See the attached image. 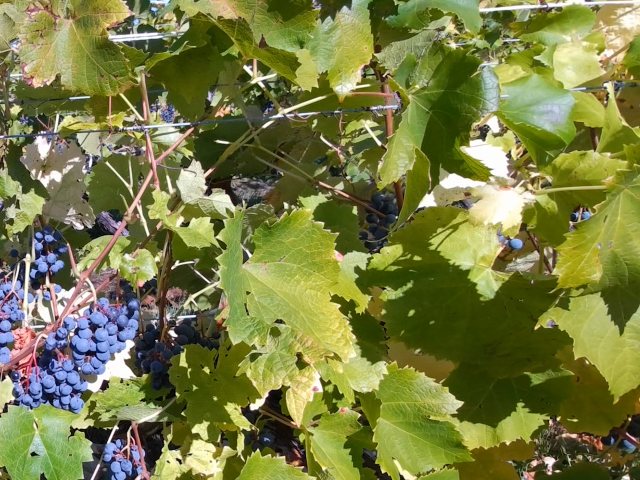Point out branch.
<instances>
[{
	"label": "branch",
	"instance_id": "1",
	"mask_svg": "<svg viewBox=\"0 0 640 480\" xmlns=\"http://www.w3.org/2000/svg\"><path fill=\"white\" fill-rule=\"evenodd\" d=\"M153 173H154L153 169H149L148 170V173H147V175L145 177V180L143 181L142 186L140 187V189L137 192L136 196L133 198V201L131 202L129 208L126 210V213L123 216V220H122L121 224L119 225L118 229L115 231V234L112 236V238L110 239V241L106 245V247L102 250L101 255L99 256V258L93 263V265H90L88 270H87V272L83 274V276L79 280L77 286L73 290V293L71 294V297L69 298V300H67L65 302V304H64V306L62 308V311H61L59 317L54 322V324L49 323L46 326V329L43 330L44 334H49V333H52L53 331H55L59 327V325L61 324V322L63 321L65 316H70V315L74 314L75 312L79 311L86 303H88V302H90L92 300L93 295L92 294H88L87 297L84 298L82 301H80L75 307H72L71 309L68 310L69 306L75 301L79 291L82 289V287H83L84 283L86 282L87 278L90 277L92 275V273L98 268V266L104 261L107 253L113 247V245L115 244L116 240L120 236L121 232L123 231L124 227L126 226V224L128 222V219H129L132 211L136 207L138 201L141 199L142 194L145 192Z\"/></svg>",
	"mask_w": 640,
	"mask_h": 480
},
{
	"label": "branch",
	"instance_id": "3",
	"mask_svg": "<svg viewBox=\"0 0 640 480\" xmlns=\"http://www.w3.org/2000/svg\"><path fill=\"white\" fill-rule=\"evenodd\" d=\"M274 122H275V119H269L267 122H265L264 124L260 125L253 132H251L250 134L246 135L241 142H238L231 150H229L227 153H225L223 156H221L219 159H217L209 168H207L206 171L203 174V178L207 179L209 174L212 173L216 169L217 166H219L223 161H225L231 155L236 153L237 150H239L241 147L245 146L250 139L255 137L257 134H259L264 129L268 128Z\"/></svg>",
	"mask_w": 640,
	"mask_h": 480
},
{
	"label": "branch",
	"instance_id": "11",
	"mask_svg": "<svg viewBox=\"0 0 640 480\" xmlns=\"http://www.w3.org/2000/svg\"><path fill=\"white\" fill-rule=\"evenodd\" d=\"M276 76H277L276 72H272L270 74L262 75V76H260L258 78H255L254 80L249 81L246 85H244L242 87H239L238 91L239 92H244V91L248 90L249 88H251L253 85H256L257 83H260V82L265 81L267 79L275 78Z\"/></svg>",
	"mask_w": 640,
	"mask_h": 480
},
{
	"label": "branch",
	"instance_id": "14",
	"mask_svg": "<svg viewBox=\"0 0 640 480\" xmlns=\"http://www.w3.org/2000/svg\"><path fill=\"white\" fill-rule=\"evenodd\" d=\"M116 274H117V271H116V270H113L109 275H107V276H106V278H105L104 280H102V281L98 284L97 288L95 289V292H96V293H100V292H101V290H102V288H103L107 283H109V282L113 279V277H114Z\"/></svg>",
	"mask_w": 640,
	"mask_h": 480
},
{
	"label": "branch",
	"instance_id": "13",
	"mask_svg": "<svg viewBox=\"0 0 640 480\" xmlns=\"http://www.w3.org/2000/svg\"><path fill=\"white\" fill-rule=\"evenodd\" d=\"M394 188L396 190L395 196L397 197V206L399 209H402L404 207V196L401 183L396 182Z\"/></svg>",
	"mask_w": 640,
	"mask_h": 480
},
{
	"label": "branch",
	"instance_id": "12",
	"mask_svg": "<svg viewBox=\"0 0 640 480\" xmlns=\"http://www.w3.org/2000/svg\"><path fill=\"white\" fill-rule=\"evenodd\" d=\"M230 100H231L230 96L224 97L219 102L211 106L210 109H207L206 113L203 116H201L200 119H208L215 110L222 107L225 103L229 102Z\"/></svg>",
	"mask_w": 640,
	"mask_h": 480
},
{
	"label": "branch",
	"instance_id": "5",
	"mask_svg": "<svg viewBox=\"0 0 640 480\" xmlns=\"http://www.w3.org/2000/svg\"><path fill=\"white\" fill-rule=\"evenodd\" d=\"M380 86V91L383 92L385 97V104H392V100L390 99V85L388 84V80H379L375 82L363 83V84H355V89H365L371 87Z\"/></svg>",
	"mask_w": 640,
	"mask_h": 480
},
{
	"label": "branch",
	"instance_id": "9",
	"mask_svg": "<svg viewBox=\"0 0 640 480\" xmlns=\"http://www.w3.org/2000/svg\"><path fill=\"white\" fill-rule=\"evenodd\" d=\"M33 348V344L29 343L26 345V347L18 352L14 357L13 360L8 363L6 366L3 367L4 371H8L9 369H11L12 367H14L17 363H19L22 359H24L25 357H27L30 353L31 350Z\"/></svg>",
	"mask_w": 640,
	"mask_h": 480
},
{
	"label": "branch",
	"instance_id": "2",
	"mask_svg": "<svg viewBox=\"0 0 640 480\" xmlns=\"http://www.w3.org/2000/svg\"><path fill=\"white\" fill-rule=\"evenodd\" d=\"M33 238V225H28V236L26 242V269H25V280H24V299L22 305V311L24 314L22 320V326L26 327L27 322L29 320V312H28V301H29V282H30V271H31V245Z\"/></svg>",
	"mask_w": 640,
	"mask_h": 480
},
{
	"label": "branch",
	"instance_id": "7",
	"mask_svg": "<svg viewBox=\"0 0 640 480\" xmlns=\"http://www.w3.org/2000/svg\"><path fill=\"white\" fill-rule=\"evenodd\" d=\"M131 426H132V429L134 431L136 443L138 445L140 468H141V471H142L143 474H147L148 470H147L146 465H145L144 447H143V443L141 441L139 428H138L135 420L131 421Z\"/></svg>",
	"mask_w": 640,
	"mask_h": 480
},
{
	"label": "branch",
	"instance_id": "6",
	"mask_svg": "<svg viewBox=\"0 0 640 480\" xmlns=\"http://www.w3.org/2000/svg\"><path fill=\"white\" fill-rule=\"evenodd\" d=\"M336 94H337L336 90L328 91V92H326L324 94H321V95H318V96H315V97H312V98H308L305 101L297 103L296 105H293L291 107L282 108L281 112H293L295 110H298L299 108H303V107L307 106L308 104H311V103H314V102H317V101H321L323 99H326L328 97L334 96Z\"/></svg>",
	"mask_w": 640,
	"mask_h": 480
},
{
	"label": "branch",
	"instance_id": "4",
	"mask_svg": "<svg viewBox=\"0 0 640 480\" xmlns=\"http://www.w3.org/2000/svg\"><path fill=\"white\" fill-rule=\"evenodd\" d=\"M172 259H173V253L169 252L167 257L165 273H164L163 288L160 294V302H159V328L160 329L164 328V304H165V297L168 291V283H169L170 270L172 266Z\"/></svg>",
	"mask_w": 640,
	"mask_h": 480
},
{
	"label": "branch",
	"instance_id": "8",
	"mask_svg": "<svg viewBox=\"0 0 640 480\" xmlns=\"http://www.w3.org/2000/svg\"><path fill=\"white\" fill-rule=\"evenodd\" d=\"M195 131L194 127H190L181 137H179L173 144L168 146L163 153L156 160V164L160 165L163 160L167 157V155L174 150L177 146H179L184 140H186L193 132Z\"/></svg>",
	"mask_w": 640,
	"mask_h": 480
},
{
	"label": "branch",
	"instance_id": "10",
	"mask_svg": "<svg viewBox=\"0 0 640 480\" xmlns=\"http://www.w3.org/2000/svg\"><path fill=\"white\" fill-rule=\"evenodd\" d=\"M163 226L162 222H158L153 229L151 230V232H149L145 238L141 241V243L132 251L131 256L132 257H136L137 254L139 253V251H141L145 245L148 243V241L158 232V230Z\"/></svg>",
	"mask_w": 640,
	"mask_h": 480
}]
</instances>
